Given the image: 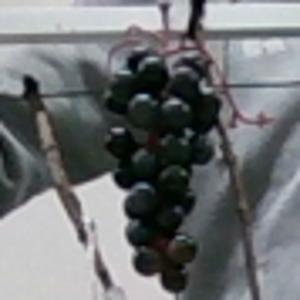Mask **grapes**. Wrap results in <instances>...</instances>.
<instances>
[{"mask_svg":"<svg viewBox=\"0 0 300 300\" xmlns=\"http://www.w3.org/2000/svg\"><path fill=\"white\" fill-rule=\"evenodd\" d=\"M124 67L100 89L101 108L150 136L147 144L138 143L129 129L110 122L99 143L115 159L114 184L129 191L122 209L133 268L146 278L159 275L166 291L179 294L190 286L188 266L201 244L178 231L198 209V196L189 187L193 166L215 159L207 135L218 127L223 101L214 88L198 83L209 70L202 54H179L171 71L160 48L142 43L128 51Z\"/></svg>","mask_w":300,"mask_h":300,"instance_id":"01657485","label":"grapes"}]
</instances>
